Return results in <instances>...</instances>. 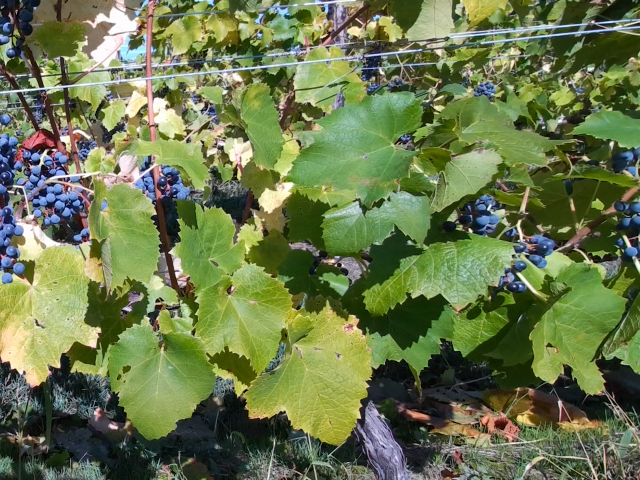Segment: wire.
Masks as SVG:
<instances>
[{
    "mask_svg": "<svg viewBox=\"0 0 640 480\" xmlns=\"http://www.w3.org/2000/svg\"><path fill=\"white\" fill-rule=\"evenodd\" d=\"M620 31H640V26H618V27L605 28V29H589V30L560 32V33L531 34V35H525L519 38L489 40V41L480 42V43L414 47V48H407L402 50H394V51H386V52H370V53H361L356 55L336 56L334 58H327V59L295 60V61L285 62L281 64L256 65V66H249V67H242V68H228V69L221 68V69H215L212 71L190 72V73H185L183 75H153V76H147V77H133L128 79L106 80L103 82L77 83V84H71V85L38 86V87L22 89V90H2L0 91V96L24 95V94L37 93L40 91L74 90L79 88L106 87L109 85L130 84V83H136V82H149V81H155V80H185L192 77L214 76V75L223 74V73H226V74L244 73V72H252V71H258V70L283 69V68L293 67L297 65L329 64V63H336L339 61H346V60H358V59L373 58V57H388V56L404 55V54L416 53V52H432V51H445V50H455V49L483 48V47L499 45V44L521 43L527 40H534V39L574 37V36H583V35H591V34H607V33H614V32H620Z\"/></svg>",
    "mask_w": 640,
    "mask_h": 480,
    "instance_id": "1",
    "label": "wire"
},
{
    "mask_svg": "<svg viewBox=\"0 0 640 480\" xmlns=\"http://www.w3.org/2000/svg\"><path fill=\"white\" fill-rule=\"evenodd\" d=\"M640 17L637 18H620L615 20H598V21H585L571 24H544L529 27H501L486 30H478L474 32H451L450 36L453 40L460 38H474L478 36H495L501 34H511L512 32H531L543 29H573L587 26H600V25H617L622 23H639Z\"/></svg>",
    "mask_w": 640,
    "mask_h": 480,
    "instance_id": "2",
    "label": "wire"
},
{
    "mask_svg": "<svg viewBox=\"0 0 640 480\" xmlns=\"http://www.w3.org/2000/svg\"><path fill=\"white\" fill-rule=\"evenodd\" d=\"M305 49H297L288 52H269V53H258V54H247V55H238V56H226L222 58L216 59H187V60H171L165 61L162 63H153V68H164L167 66L173 65H189V64H218L225 63L228 61H240V60H249V59H260V58H271V57H290L299 54H305Z\"/></svg>",
    "mask_w": 640,
    "mask_h": 480,
    "instance_id": "3",
    "label": "wire"
},
{
    "mask_svg": "<svg viewBox=\"0 0 640 480\" xmlns=\"http://www.w3.org/2000/svg\"><path fill=\"white\" fill-rule=\"evenodd\" d=\"M147 66H148L147 62L115 64V65H110V66L93 67L91 69V72L95 73V72L112 71V70H117V69H127V68H145Z\"/></svg>",
    "mask_w": 640,
    "mask_h": 480,
    "instance_id": "4",
    "label": "wire"
}]
</instances>
